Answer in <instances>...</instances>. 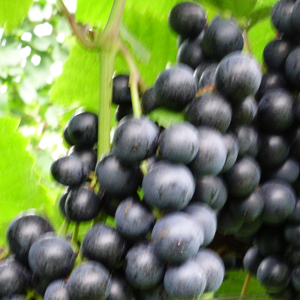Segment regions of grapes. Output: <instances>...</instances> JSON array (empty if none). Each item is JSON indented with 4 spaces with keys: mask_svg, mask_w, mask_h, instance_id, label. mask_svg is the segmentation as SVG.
Segmentation results:
<instances>
[{
    "mask_svg": "<svg viewBox=\"0 0 300 300\" xmlns=\"http://www.w3.org/2000/svg\"><path fill=\"white\" fill-rule=\"evenodd\" d=\"M206 21L195 2L170 10L179 67L166 68L142 95L147 113L187 110L192 123L164 129L132 113L127 74L113 78L115 152L97 163L96 115L71 118L68 156L52 167L68 185L60 213L87 222L102 209L115 226L87 230V261L65 283L73 245L40 210L21 211L6 231L0 300H23L26 287L45 300H197L225 275L221 256L205 248L216 229L252 243L243 264L264 292L300 300V0L273 5L279 34L264 47L263 74L242 52L233 19ZM96 166L97 178H98V181L100 182V184H101V186L99 187V190L97 191L96 187L91 183L90 180H88L87 178H84ZM141 162L148 158L149 169H147L146 172L144 173L141 168H139Z\"/></svg>",
    "mask_w": 300,
    "mask_h": 300,
    "instance_id": "obj_1",
    "label": "grapes"
}]
</instances>
